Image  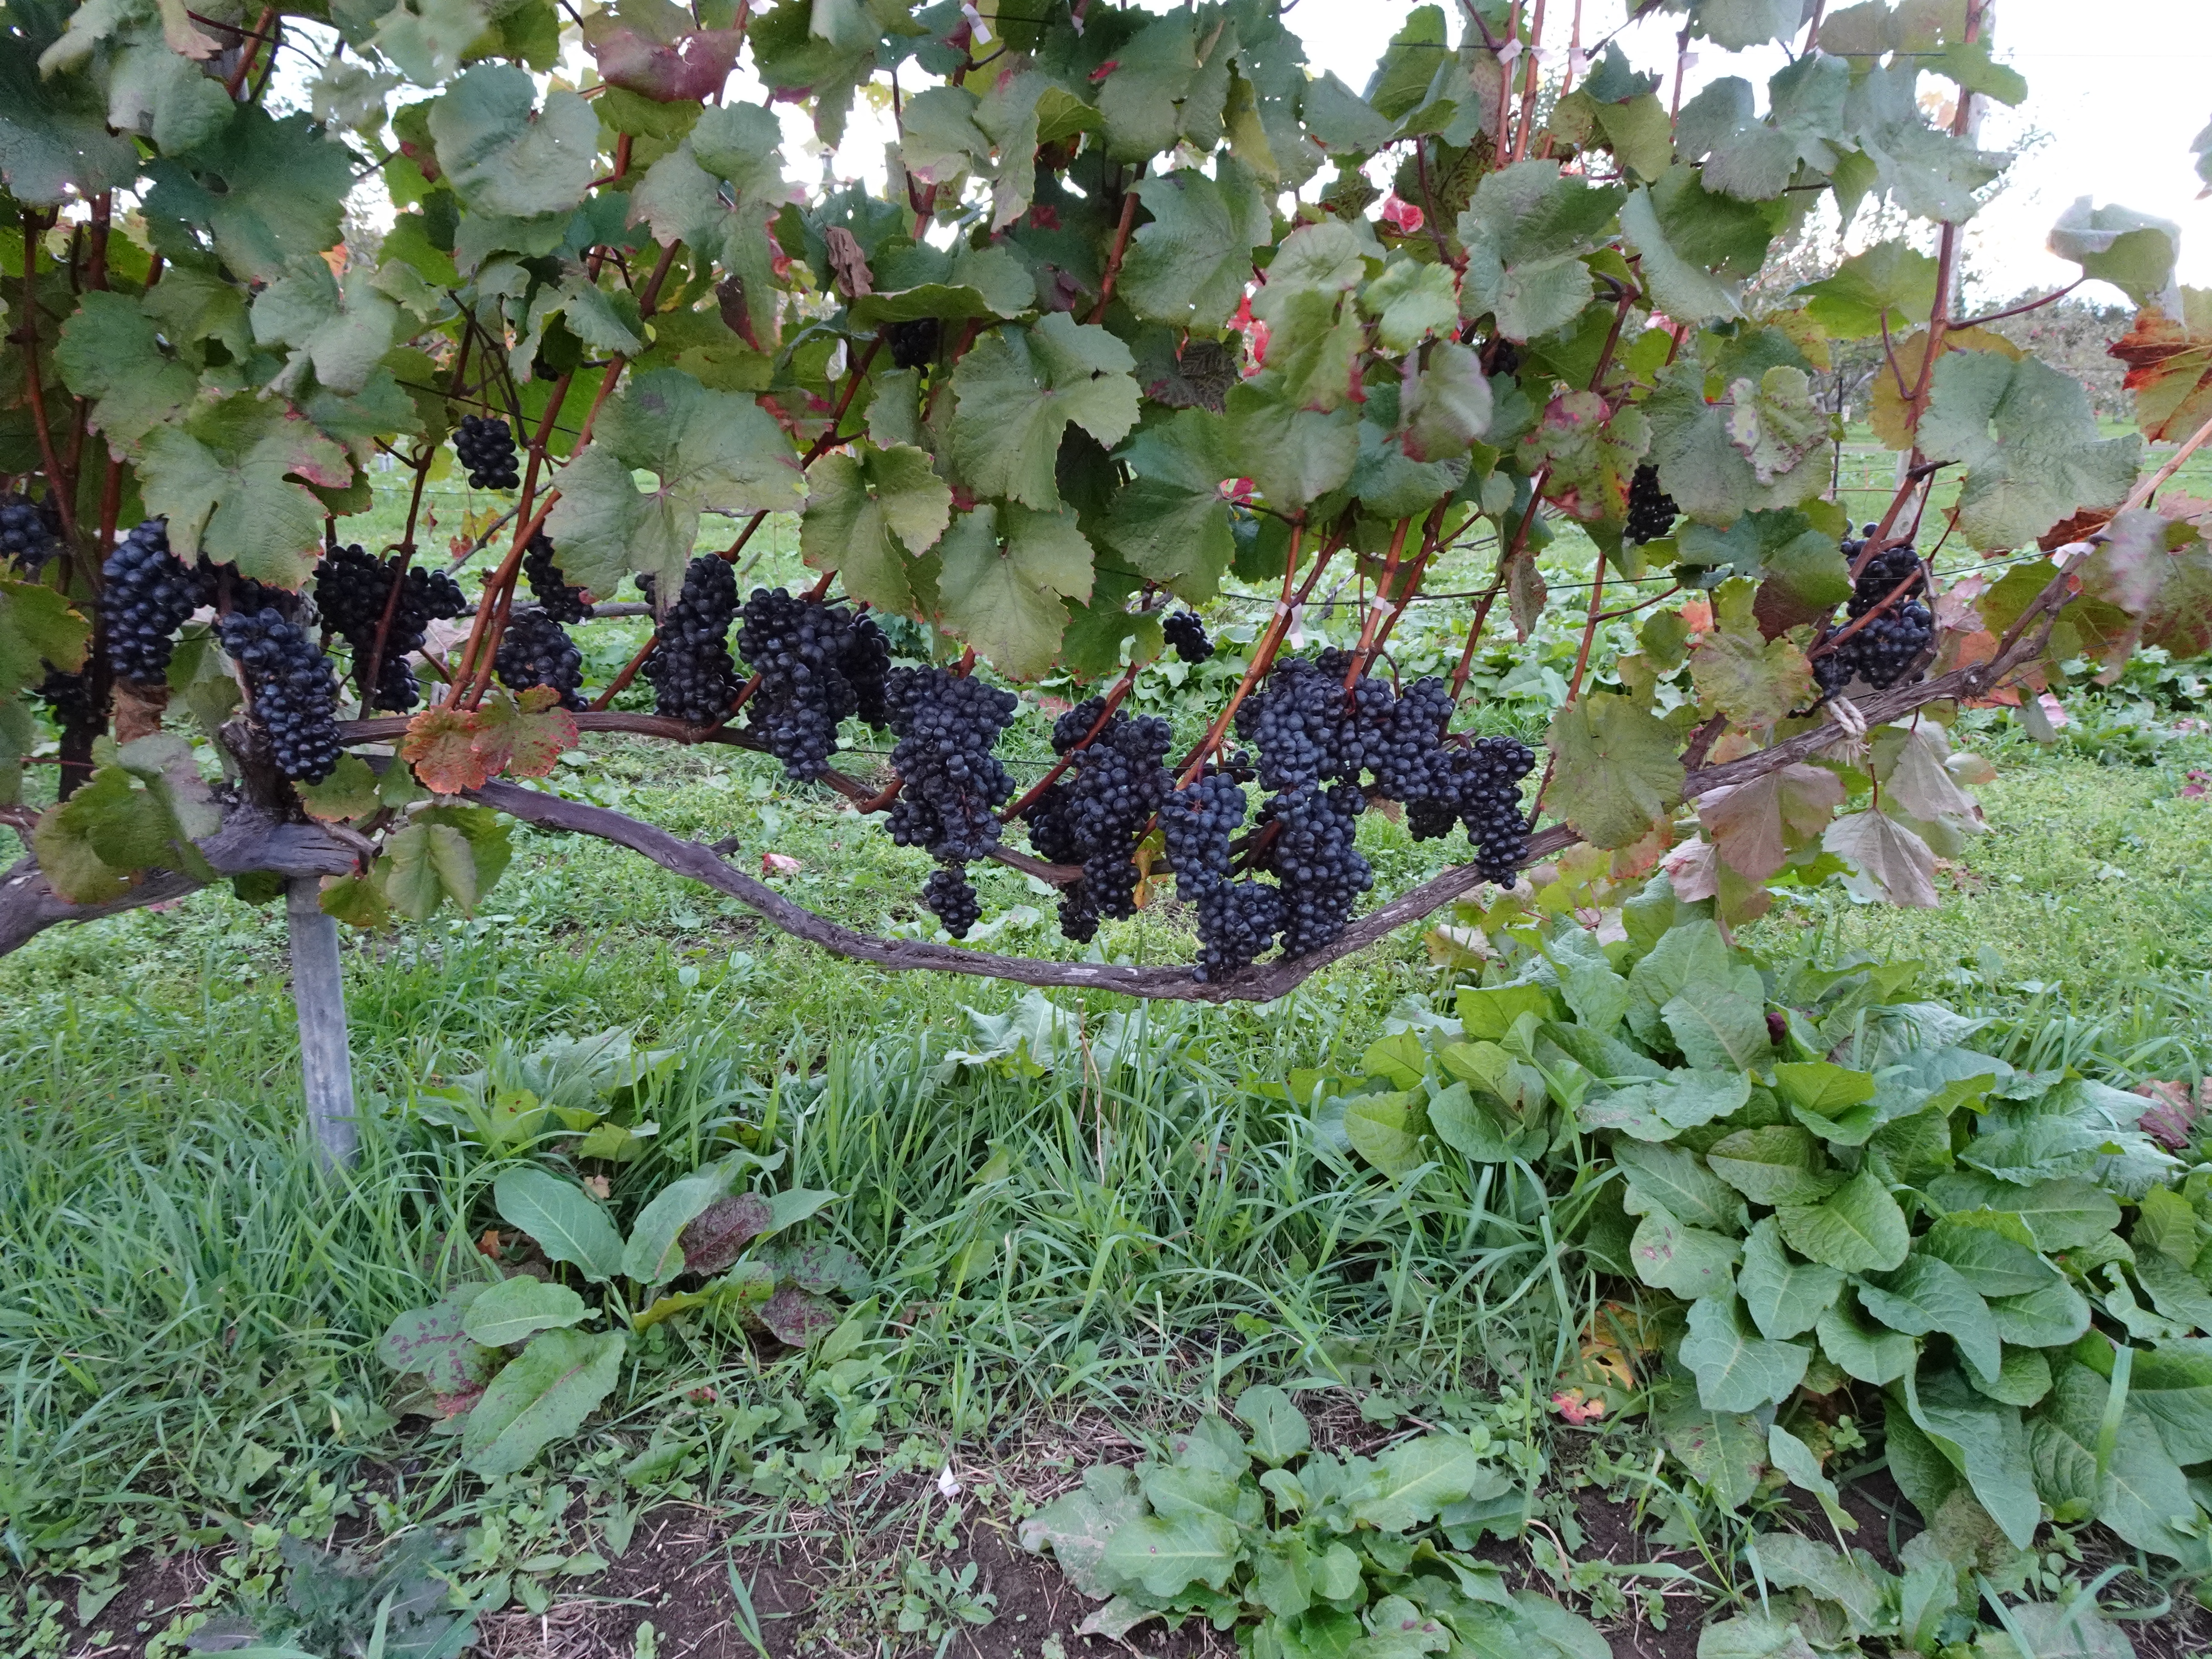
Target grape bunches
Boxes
[1016,779,1099,953]
[1789,613,1856,726]
[666,555,739,730]
[916,857,992,940]
[312,541,470,618]
[1049,690,1129,761]
[315,564,433,716]
[223,605,349,787]
[878,314,943,378]
[1231,656,1349,801]
[743,587,862,785]
[493,606,598,715]
[212,547,313,617]
[1617,444,1683,547]
[1451,733,1541,894]
[1394,747,1461,853]
[1185,865,1294,987]
[445,410,524,494]
[38,638,119,748]
[100,516,218,699]
[529,340,585,384]
[1071,745,1163,924]
[1253,784,1379,962]
[841,607,898,735]
[1476,339,1532,378]
[1113,708,1174,812]
[512,521,597,626]
[1158,598,1220,673]
[630,565,699,712]
[1841,516,1942,695]
[1168,746,1250,907]
[1345,667,1461,807]
[4,484,67,575]
[883,652,1023,862]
